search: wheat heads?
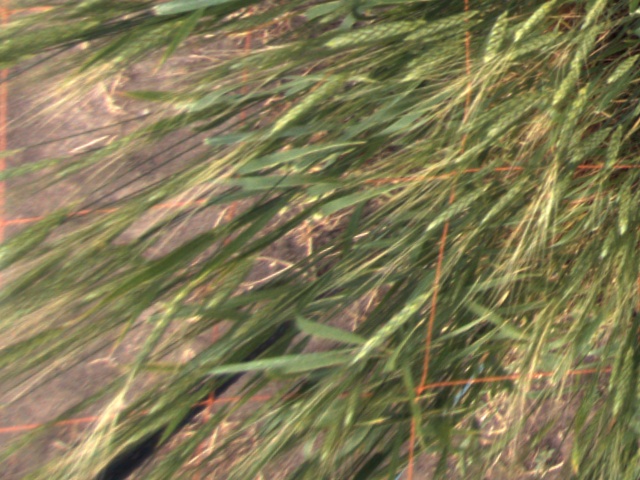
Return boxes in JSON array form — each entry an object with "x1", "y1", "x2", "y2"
[
  {"x1": 2, "y1": 204, "x2": 74, "y2": 267},
  {"x1": 211, "y1": 255, "x2": 252, "y2": 306},
  {"x1": 608, "y1": 125, "x2": 625, "y2": 167},
  {"x1": 608, "y1": 54, "x2": 635, "y2": 86},
  {"x1": 613, "y1": 350, "x2": 635, "y2": 414},
  {"x1": 0, "y1": 328, "x2": 58, "y2": 365},
  {"x1": 577, "y1": 126, "x2": 609, "y2": 162},
  {"x1": 143, "y1": 288, "x2": 189, "y2": 362},
  {"x1": 515, "y1": 0, "x2": 555, "y2": 44},
  {"x1": 486, "y1": 9, "x2": 506, "y2": 64},
  {"x1": 153, "y1": 359, "x2": 213, "y2": 413},
  {"x1": 236, "y1": 295, "x2": 285, "y2": 336},
  {"x1": 408, "y1": 40, "x2": 460, "y2": 78},
  {"x1": 563, "y1": 89, "x2": 586, "y2": 148},
  {"x1": 556, "y1": 55, "x2": 579, "y2": 106},
  {"x1": 6, "y1": 159, "x2": 57, "y2": 176},
  {"x1": 619, "y1": 186, "x2": 632, "y2": 233},
  {"x1": 226, "y1": 8, "x2": 285, "y2": 30},
  {"x1": 491, "y1": 93, "x2": 541, "y2": 136},
  {"x1": 324, "y1": 19, "x2": 422, "y2": 52},
  {"x1": 354, "y1": 294, "x2": 429, "y2": 366},
  {"x1": 409, "y1": 9, "x2": 475, "y2": 43},
  {"x1": 581, "y1": 0, "x2": 604, "y2": 27},
  {"x1": 73, "y1": 132, "x2": 143, "y2": 168},
  {"x1": 111, "y1": 22, "x2": 177, "y2": 68},
  {"x1": 227, "y1": 49, "x2": 290, "y2": 75},
  {"x1": 3, "y1": 18, "x2": 96, "y2": 61},
  {"x1": 487, "y1": 176, "x2": 528, "y2": 224},
  {"x1": 273, "y1": 76, "x2": 338, "y2": 130},
  {"x1": 423, "y1": 184, "x2": 486, "y2": 233},
  {"x1": 586, "y1": 318, "x2": 611, "y2": 342}
]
